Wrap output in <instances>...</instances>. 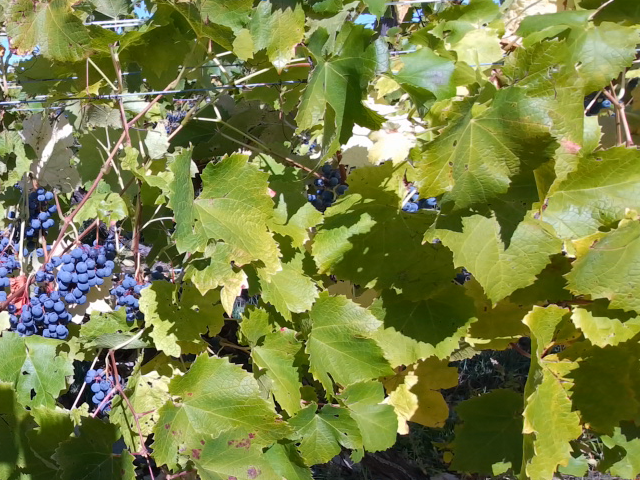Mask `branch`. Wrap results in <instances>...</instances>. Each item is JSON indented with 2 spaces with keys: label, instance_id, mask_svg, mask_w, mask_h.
<instances>
[{
  "label": "branch",
  "instance_id": "1af6ec82",
  "mask_svg": "<svg viewBox=\"0 0 640 480\" xmlns=\"http://www.w3.org/2000/svg\"><path fill=\"white\" fill-rule=\"evenodd\" d=\"M307 59H308L307 55L296 56V57L291 58L289 60V63L290 64H294V63H296L298 61H304V60H307Z\"/></svg>",
  "mask_w": 640,
  "mask_h": 480
},
{
  "label": "branch",
  "instance_id": "45aa463d",
  "mask_svg": "<svg viewBox=\"0 0 640 480\" xmlns=\"http://www.w3.org/2000/svg\"><path fill=\"white\" fill-rule=\"evenodd\" d=\"M230 92V89H224L223 91H221L220 93L216 94L214 97H212L207 103L203 104L202 106H200L197 110H195L189 117L188 119L184 120L183 122H181L176 128H174L172 131H170L167 134V140L171 141L172 137L174 135H176L178 132H180L186 125L190 124L201 112H203L204 110L208 109L209 107H211L218 99L223 98L224 96H226L228 93Z\"/></svg>",
  "mask_w": 640,
  "mask_h": 480
},
{
  "label": "branch",
  "instance_id": "ea751061",
  "mask_svg": "<svg viewBox=\"0 0 640 480\" xmlns=\"http://www.w3.org/2000/svg\"><path fill=\"white\" fill-rule=\"evenodd\" d=\"M114 57H115V61H116V88H115V94H121L124 93L123 90V82L121 79V59H120V55L118 51L114 52Z\"/></svg>",
  "mask_w": 640,
  "mask_h": 480
},
{
  "label": "branch",
  "instance_id": "1d269e1b",
  "mask_svg": "<svg viewBox=\"0 0 640 480\" xmlns=\"http://www.w3.org/2000/svg\"><path fill=\"white\" fill-rule=\"evenodd\" d=\"M99 223H100V220H99V219H94V220H93V222H92V224H91L88 228H86V229H85V230H83L80 234H78V236H79V242L81 241V239H83V238H84V236H86L88 233L92 232V231L97 227V225H98Z\"/></svg>",
  "mask_w": 640,
  "mask_h": 480
},
{
  "label": "branch",
  "instance_id": "982ccf7c",
  "mask_svg": "<svg viewBox=\"0 0 640 480\" xmlns=\"http://www.w3.org/2000/svg\"><path fill=\"white\" fill-rule=\"evenodd\" d=\"M230 54H231L230 50H224V51H219V52L209 56L207 59L202 60L199 63L193 65L187 72H185V73L181 74L180 76L176 77L175 79H173L171 82H169L163 88V90L171 89L178 82H181L183 79L191 76L193 74V72H195L197 69L201 68L202 66L209 64L211 61L216 60L217 58H219L221 56H227V55H230Z\"/></svg>",
  "mask_w": 640,
  "mask_h": 480
},
{
  "label": "branch",
  "instance_id": "30e6481e",
  "mask_svg": "<svg viewBox=\"0 0 640 480\" xmlns=\"http://www.w3.org/2000/svg\"><path fill=\"white\" fill-rule=\"evenodd\" d=\"M161 99H162V95H157L156 98L148 106H146L139 114H137L132 119H130L129 122L127 121V117L125 115V107H124L123 100L122 99L118 100V106H119V109H120V118H121L122 123H123L124 131L118 137L116 143L112 147L108 157L106 158L103 166L101 167L98 176L95 178L93 184L91 185L87 195L77 204V206L75 207V209L73 210L71 215L69 217L65 218V223L61 227V230L59 231L55 242L52 244L48 254L46 255V257L44 259L45 263H49L50 262L51 258L54 255L55 250L57 249L58 245L61 243V240H62V238H63L68 226L72 223V220L77 216V214L82 209V207L92 198V196H93V194H94V192H95V190H96V188L98 186V183L102 180L103 176L105 175L106 169L108 168V166L110 165L111 161L113 160V157L116 154L117 149L122 144L124 138L126 140V142L124 143V147L125 148H130L131 147V138H130V128H131V126L135 122H137L139 119H141L144 115H146L153 107H155L161 101Z\"/></svg>",
  "mask_w": 640,
  "mask_h": 480
},
{
  "label": "branch",
  "instance_id": "170604dd",
  "mask_svg": "<svg viewBox=\"0 0 640 480\" xmlns=\"http://www.w3.org/2000/svg\"><path fill=\"white\" fill-rule=\"evenodd\" d=\"M109 355L111 358V362H112V370L114 372V385L117 389V391L120 393V396L125 404V406L130 410V412L133 415V422H134V429L139 437V441L141 443V447L143 448V450L145 451V455L149 456L150 455V449L146 444L144 435L141 431V428L139 426V419H138V413L135 410V408L133 407V405L130 403L129 399L127 398L126 394H125V390L122 389V386L120 385L119 382V370L117 367V359L115 356V352L113 350L109 351Z\"/></svg>",
  "mask_w": 640,
  "mask_h": 480
},
{
  "label": "branch",
  "instance_id": "1ff4a987",
  "mask_svg": "<svg viewBox=\"0 0 640 480\" xmlns=\"http://www.w3.org/2000/svg\"><path fill=\"white\" fill-rule=\"evenodd\" d=\"M142 213H143V207L139 206L138 210H137V220H136V229H135V233L136 234H135V242H134V246H133L135 270H136L137 255L139 254Z\"/></svg>",
  "mask_w": 640,
  "mask_h": 480
},
{
  "label": "branch",
  "instance_id": "325d2c04",
  "mask_svg": "<svg viewBox=\"0 0 640 480\" xmlns=\"http://www.w3.org/2000/svg\"><path fill=\"white\" fill-rule=\"evenodd\" d=\"M608 86L611 91V94L606 89L602 90V94L605 95L611 102H613V105H614V125H615L616 141L618 144L622 143L621 128L623 124L624 130H625V137H626L625 147L629 148L631 146H634L635 142L631 141L630 128H629L628 121L625 117L624 104L618 101V94L616 92V89L612 81L608 82Z\"/></svg>",
  "mask_w": 640,
  "mask_h": 480
},
{
  "label": "branch",
  "instance_id": "ca6c30ca",
  "mask_svg": "<svg viewBox=\"0 0 640 480\" xmlns=\"http://www.w3.org/2000/svg\"><path fill=\"white\" fill-rule=\"evenodd\" d=\"M274 70H275V66L271 65L269 67H265L263 69H259V70L255 71L254 73H252V74H250L248 76L235 79V80L232 81V83L247 82V81L255 79L257 76H260V75L268 73V72H272Z\"/></svg>",
  "mask_w": 640,
  "mask_h": 480
}]
</instances>
